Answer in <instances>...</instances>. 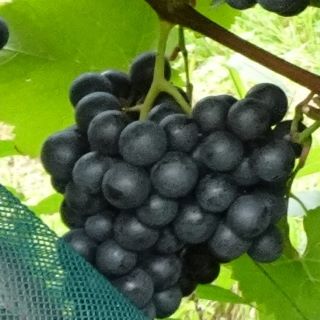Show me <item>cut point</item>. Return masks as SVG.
Wrapping results in <instances>:
<instances>
[{"mask_svg": "<svg viewBox=\"0 0 320 320\" xmlns=\"http://www.w3.org/2000/svg\"><path fill=\"white\" fill-rule=\"evenodd\" d=\"M175 25L160 20V38L158 43V49L156 54L154 76L151 86L148 90V93L145 97L144 103L142 105L132 107V108H122L123 111H134L140 113L138 121H147L149 122V111L151 105L157 95L160 92H167L175 98V100L183 107V110L186 115V119H193V109L190 108L189 104L183 97V95L174 87H172L169 82L164 78V54L166 49V43L168 38L169 31Z\"/></svg>", "mask_w": 320, "mask_h": 320, "instance_id": "1", "label": "cut point"}]
</instances>
